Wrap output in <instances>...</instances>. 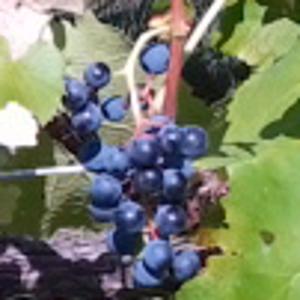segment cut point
<instances>
[{
    "label": "cut point",
    "mask_w": 300,
    "mask_h": 300,
    "mask_svg": "<svg viewBox=\"0 0 300 300\" xmlns=\"http://www.w3.org/2000/svg\"><path fill=\"white\" fill-rule=\"evenodd\" d=\"M83 165H67L48 168H19L11 170H0V179H16L24 177H53L71 174H83Z\"/></svg>",
    "instance_id": "cut-point-2"
},
{
    "label": "cut point",
    "mask_w": 300,
    "mask_h": 300,
    "mask_svg": "<svg viewBox=\"0 0 300 300\" xmlns=\"http://www.w3.org/2000/svg\"><path fill=\"white\" fill-rule=\"evenodd\" d=\"M171 30L170 24H166L165 26H160L155 29H151L146 33H143L140 38H138L131 49V55L128 59L127 66H126V76H127V83H128V95L130 104L132 105L133 109V117L134 122L137 127H141L147 123V120L144 116H142V111L139 106V102L137 101L136 92H135V80H134V64L139 56L140 51L145 46L146 42L154 37L161 35L163 33H167Z\"/></svg>",
    "instance_id": "cut-point-1"
}]
</instances>
